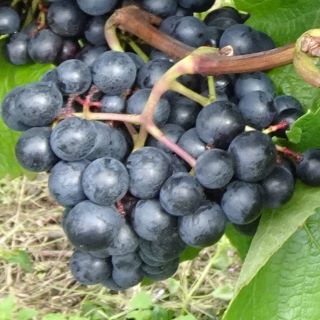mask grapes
Wrapping results in <instances>:
<instances>
[{"label": "grapes", "mask_w": 320, "mask_h": 320, "mask_svg": "<svg viewBox=\"0 0 320 320\" xmlns=\"http://www.w3.org/2000/svg\"><path fill=\"white\" fill-rule=\"evenodd\" d=\"M12 1L0 0V35L10 34L4 57L15 66L56 67L6 95L0 116L25 131L15 146L19 165L50 173L52 198L65 207L62 224L77 248L69 270L79 282L128 290L143 277L165 280L178 270L185 244L211 247L227 219L254 237L264 206L286 205L297 179L320 186V147L301 152L299 163L278 152V165L273 139L290 140L289 123L262 132L306 114L296 97L279 95L267 75L273 68L214 76L217 102L205 107L170 90L160 97L152 122L197 160L195 176L149 133L133 151L131 132L111 120L69 117L53 128L69 94L84 100L92 84L101 92L91 95L99 106L90 113L141 115L154 84L178 62L137 35L149 62L128 41L124 52L111 50L103 27L116 10L142 8L163 19L152 24L161 32L195 48L230 47L228 56L276 48L245 25L250 14L224 6L204 22L193 16L216 0H40L48 13L39 29L38 7L25 23L32 0Z\"/></svg>", "instance_id": "1"}]
</instances>
